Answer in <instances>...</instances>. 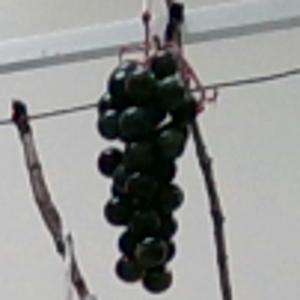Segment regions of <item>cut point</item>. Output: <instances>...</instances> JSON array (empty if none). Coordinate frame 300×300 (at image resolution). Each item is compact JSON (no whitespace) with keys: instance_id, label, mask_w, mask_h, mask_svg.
<instances>
[{"instance_id":"6a23745f","label":"cut point","mask_w":300,"mask_h":300,"mask_svg":"<svg viewBox=\"0 0 300 300\" xmlns=\"http://www.w3.org/2000/svg\"><path fill=\"white\" fill-rule=\"evenodd\" d=\"M139 22L141 23L142 31H144V62L153 54V44L150 39L152 25L154 23L152 0H142V12L139 16Z\"/></svg>"}]
</instances>
